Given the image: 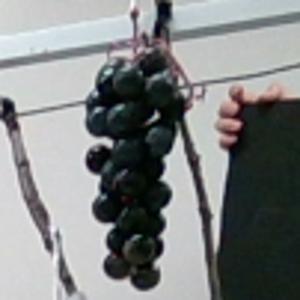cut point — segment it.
<instances>
[{
    "label": "cut point",
    "instance_id": "1",
    "mask_svg": "<svg viewBox=\"0 0 300 300\" xmlns=\"http://www.w3.org/2000/svg\"><path fill=\"white\" fill-rule=\"evenodd\" d=\"M141 10H140V0H129V9L127 10V17L129 19L130 25L132 26L133 30V58L132 63L136 64L137 61V30H138V23L141 20Z\"/></svg>",
    "mask_w": 300,
    "mask_h": 300
}]
</instances>
